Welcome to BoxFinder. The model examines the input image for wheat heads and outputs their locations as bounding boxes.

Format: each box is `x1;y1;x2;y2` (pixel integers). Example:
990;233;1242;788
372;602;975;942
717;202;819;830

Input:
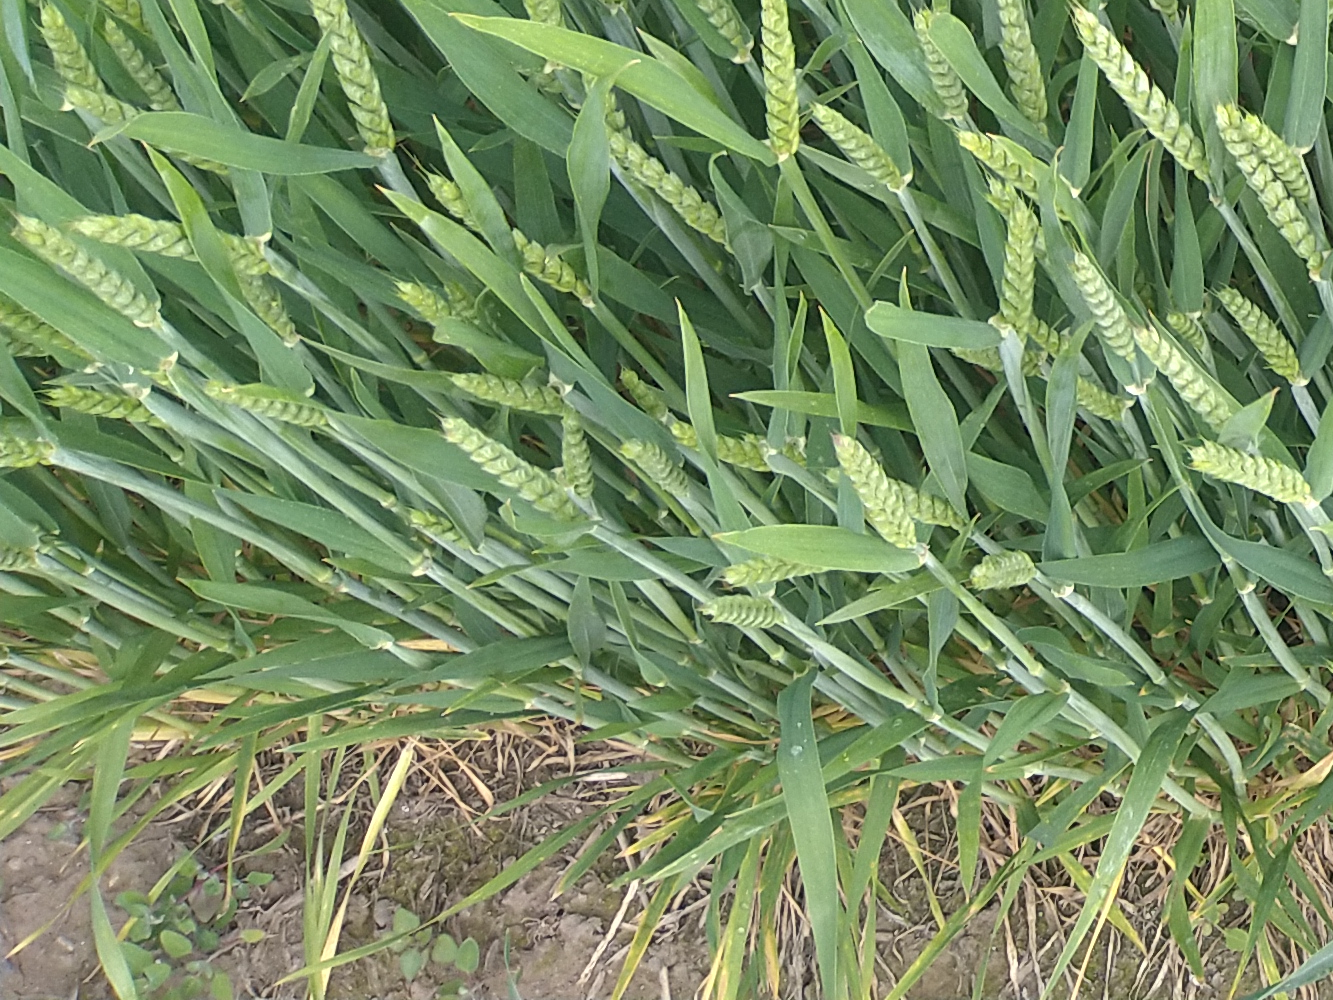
698;594;781;627
1216;288;1300;376
11;214;158;328
1028;310;1070;354
758;0;798;160
0;543;37;569
619;365;685;436
812;104;902;191
405;510;474;552
103;20;180;108
1190;439;1316;503
830;459;969;526
71;90;237;177
561;406;598;496
953;342;1051;378
601;0;630;14
1138;329;1238;429
676;423;765;473
726;557;831;586
0;333;50;352
912;8;971;115
1216;105;1324;276
395;280;461;327
509;0;574;68
1001;208;1035;328
1070;4;1216;180
445;285;507;343
0;432;53;472
1231;105;1317;218
621;439;693;497
1043;364;1125;426
207;381;327;427
27;521;77;555
986;0;1047;122
39;385;165;426
968;549;1034;592
85;0;169;36
652;0;754;57
444;418;574;519
584;69;633;140
1170;310;1210;362
742;436;809;468
1074;249;1140;359
452;369;580;417
961;129;1067;216
424;173;592;298
982;180;1050;271
235;266;298;340
836;431;916;547
72;210;269;274
37;3;111;128
294;0;395;154
606;133;727;248
0;292;99;357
